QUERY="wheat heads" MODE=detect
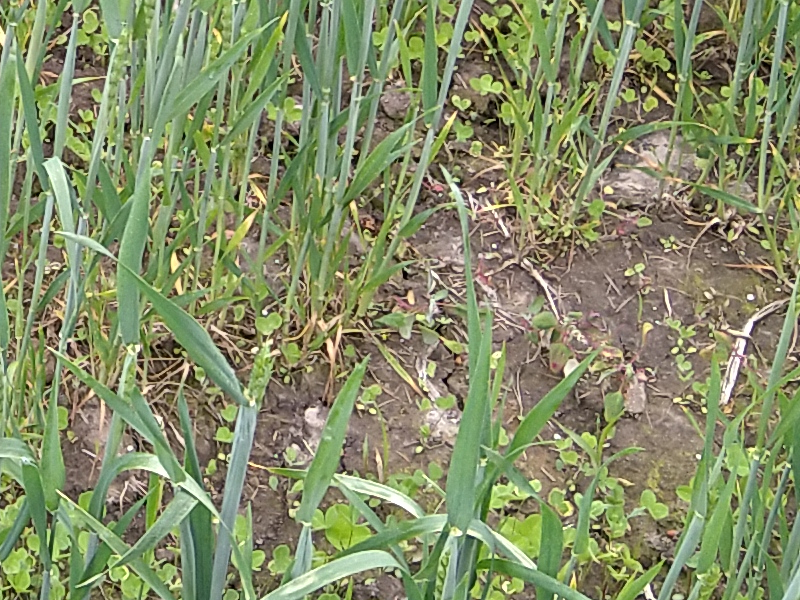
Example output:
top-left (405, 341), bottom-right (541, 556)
top-left (437, 545), bottom-right (452, 600)
top-left (0, 328), bottom-right (6, 427)
top-left (248, 347), bottom-right (269, 405)
top-left (146, 0), bottom-right (157, 32)
top-left (104, 28), bottom-right (125, 116)
top-left (123, 354), bottom-right (138, 405)
top-left (698, 562), bottom-right (720, 600)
